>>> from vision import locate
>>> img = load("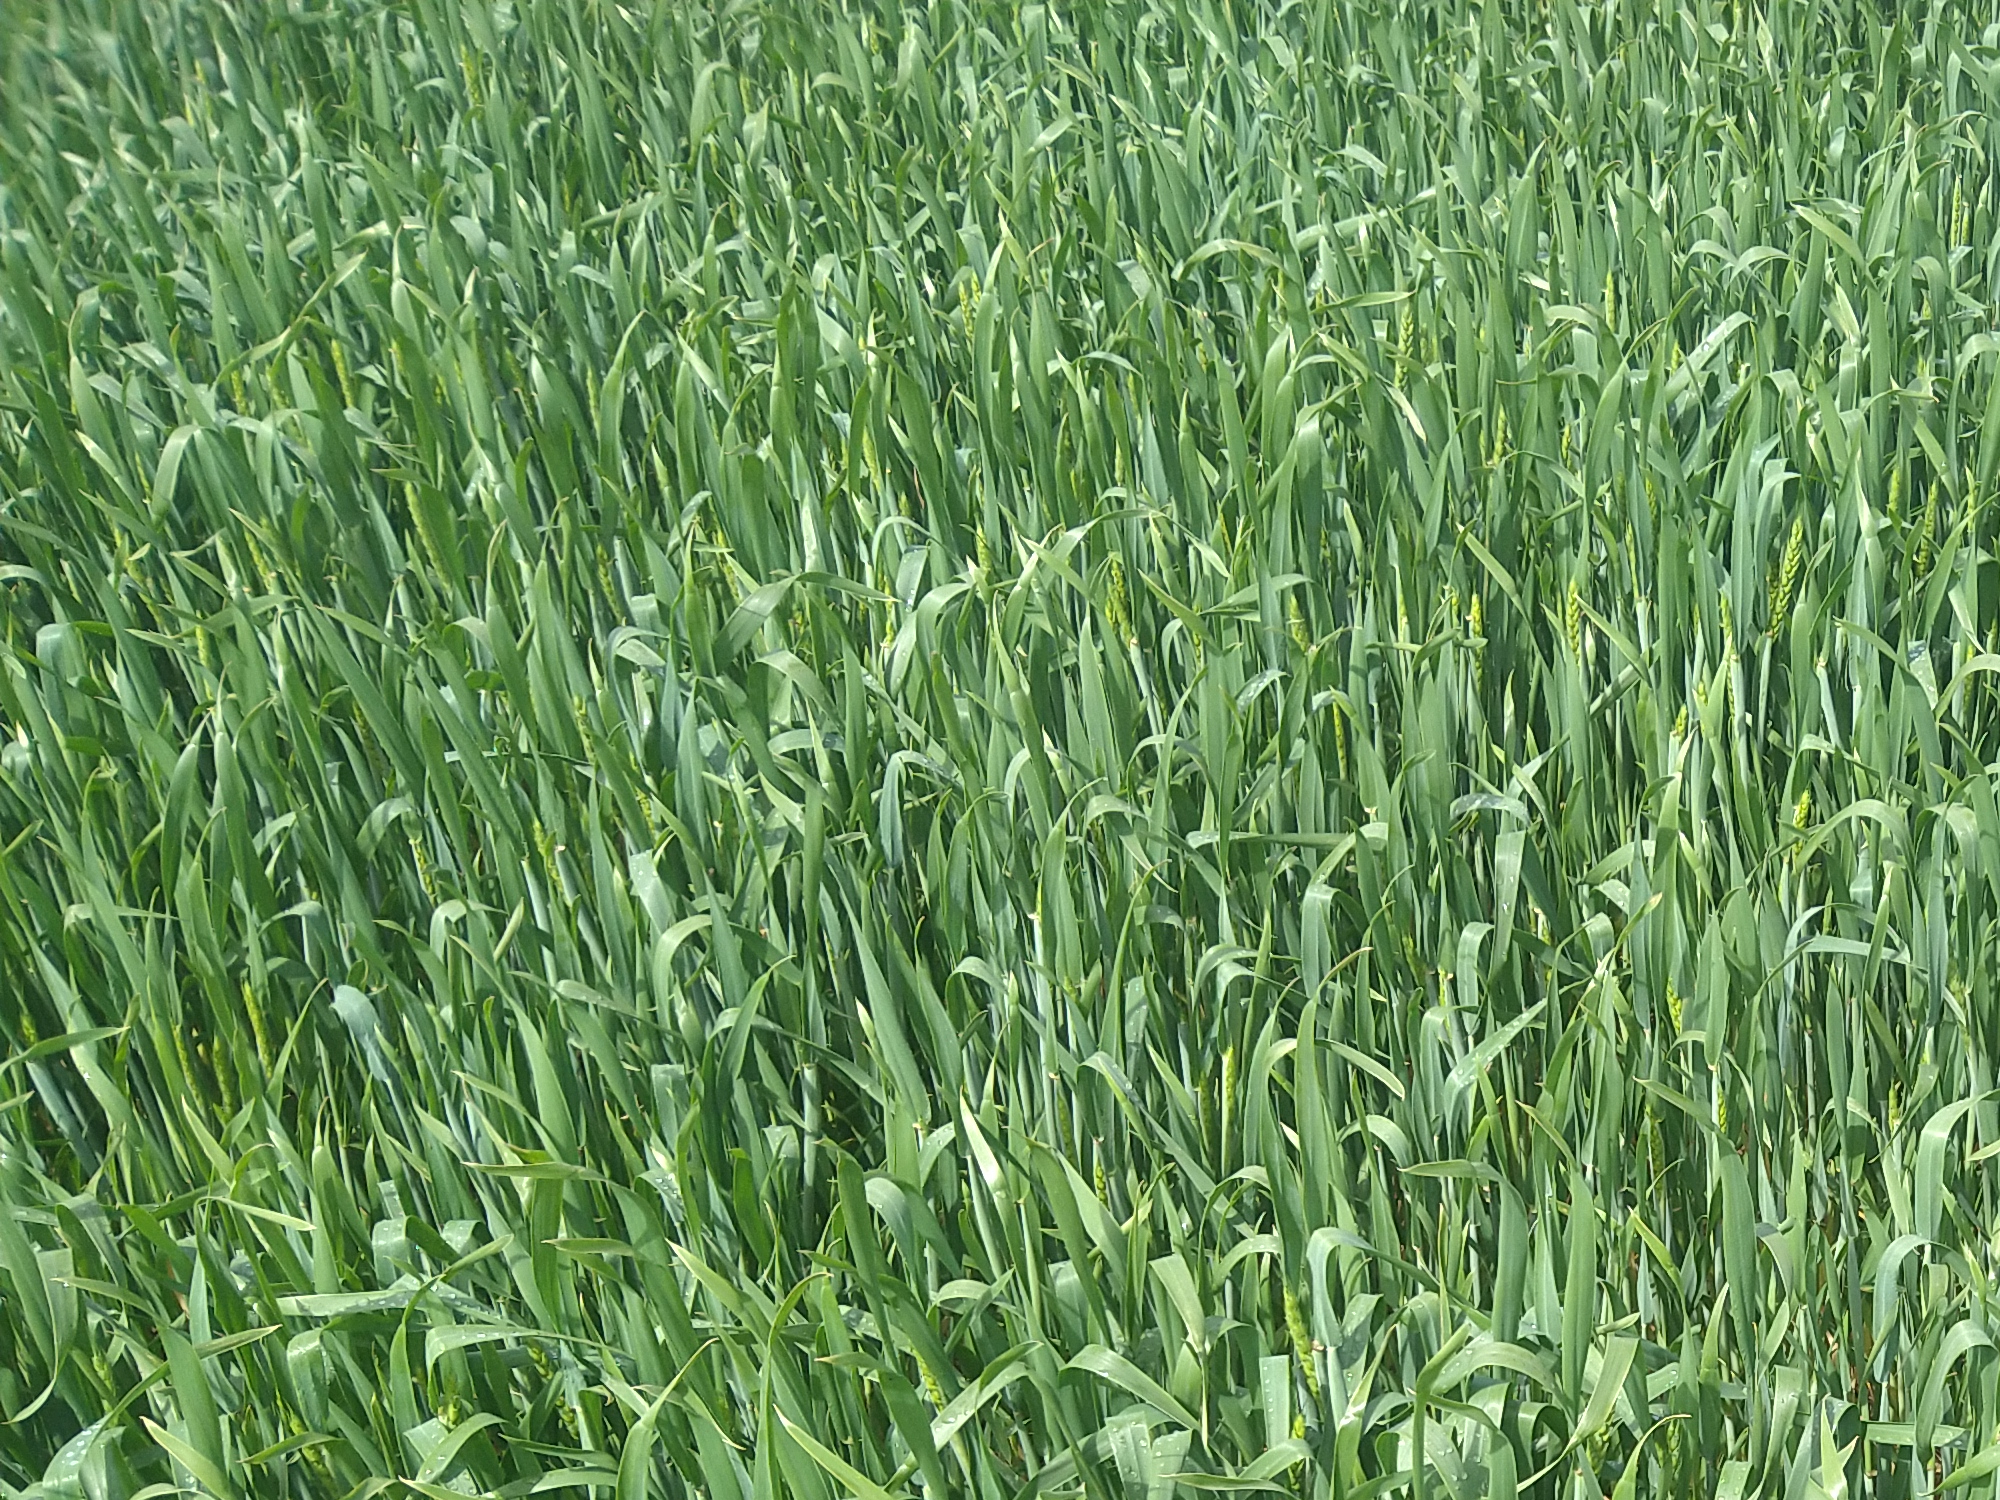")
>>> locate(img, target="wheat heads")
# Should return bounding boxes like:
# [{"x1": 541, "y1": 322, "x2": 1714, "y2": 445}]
[
  {"x1": 170, "y1": 1023, "x2": 200, "y2": 1115},
  {"x1": 1217, "y1": 512, "x2": 1232, "y2": 562},
  {"x1": 1111, "y1": 560, "x2": 1137, "y2": 604},
  {"x1": 899, "y1": 492, "x2": 913, "y2": 545},
  {"x1": 529, "y1": 808, "x2": 559, "y2": 893},
  {"x1": 432, "y1": 356, "x2": 450, "y2": 405},
  {"x1": 158, "y1": 572, "x2": 179, "y2": 605},
  {"x1": 1106, "y1": 576, "x2": 1134, "y2": 634},
  {"x1": 1399, "y1": 933, "x2": 1429, "y2": 996},
  {"x1": 1080, "y1": 500, "x2": 1086, "y2": 534},
  {"x1": 1318, "y1": 285, "x2": 1326, "y2": 326},
  {"x1": 1112, "y1": 436, "x2": 1124, "y2": 484},
  {"x1": 261, "y1": 514, "x2": 277, "y2": 572},
  {"x1": 408, "y1": 830, "x2": 434, "y2": 902},
  {"x1": 1200, "y1": 1080, "x2": 1215, "y2": 1148},
  {"x1": 1061, "y1": 393, "x2": 1074, "y2": 457},
  {"x1": 1966, "y1": 466, "x2": 1975, "y2": 534},
  {"x1": 879, "y1": 550, "x2": 899, "y2": 641},
  {"x1": 715, "y1": 546, "x2": 741, "y2": 599},
  {"x1": 393, "y1": 337, "x2": 408, "y2": 376},
  {"x1": 1718, "y1": 1082, "x2": 1728, "y2": 1135},
  {"x1": 243, "y1": 978, "x2": 271, "y2": 1087},
  {"x1": 576, "y1": 696, "x2": 600, "y2": 760},
  {"x1": 198, "y1": 61, "x2": 210, "y2": 121},
  {"x1": 1127, "y1": 370, "x2": 1141, "y2": 450},
  {"x1": 637, "y1": 775, "x2": 660, "y2": 822},
  {"x1": 1496, "y1": 403, "x2": 1507, "y2": 461},
  {"x1": 1088, "y1": 819, "x2": 1105, "y2": 859},
  {"x1": 332, "y1": 338, "x2": 351, "y2": 405},
  {"x1": 336, "y1": 62, "x2": 349, "y2": 98},
  {"x1": 1224, "y1": 1045, "x2": 1238, "y2": 1121},
  {"x1": 1334, "y1": 698, "x2": 1345, "y2": 781},
  {"x1": 861, "y1": 423, "x2": 879, "y2": 484},
  {"x1": 1289, "y1": 591, "x2": 1315, "y2": 647},
  {"x1": 975, "y1": 515, "x2": 994, "y2": 577},
  {"x1": 1267, "y1": 686, "x2": 1277, "y2": 744},
  {"x1": 116, "y1": 778, "x2": 159, "y2": 888},
  {"x1": 1978, "y1": 178, "x2": 1989, "y2": 209},
  {"x1": 695, "y1": 552, "x2": 708, "y2": 620},
  {"x1": 913, "y1": 1343, "x2": 944, "y2": 1414},
  {"x1": 824, "y1": 442, "x2": 835, "y2": 481},
  {"x1": 1540, "y1": 926, "x2": 1555, "y2": 979},
  {"x1": 1962, "y1": 202, "x2": 1972, "y2": 246},
  {"x1": 92, "y1": 1351, "x2": 120, "y2": 1422},
  {"x1": 1724, "y1": 597, "x2": 1740, "y2": 719},
  {"x1": 1768, "y1": 546, "x2": 1780, "y2": 617},
  {"x1": 1441, "y1": 968, "x2": 1450, "y2": 1029},
  {"x1": 290, "y1": 1412, "x2": 334, "y2": 1498},
  {"x1": 134, "y1": 571, "x2": 176, "y2": 633},
  {"x1": 1469, "y1": 593, "x2": 1483, "y2": 693},
  {"x1": 1948, "y1": 967, "x2": 1965, "y2": 1008},
  {"x1": 1190, "y1": 604, "x2": 1203, "y2": 664},
  {"x1": 1580, "y1": 1420, "x2": 1603, "y2": 1476},
  {"x1": 196, "y1": 611, "x2": 222, "y2": 694},
  {"x1": 19, "y1": 1005, "x2": 38, "y2": 1051},
  {"x1": 1600, "y1": 1420, "x2": 1623, "y2": 1465},
  {"x1": 1604, "y1": 270, "x2": 1613, "y2": 330},
  {"x1": 1951, "y1": 176, "x2": 1961, "y2": 250},
  {"x1": 584, "y1": 364, "x2": 601, "y2": 433},
  {"x1": 599, "y1": 546, "x2": 627, "y2": 621},
  {"x1": 1626, "y1": 521, "x2": 1639, "y2": 592},
  {"x1": 298, "y1": 859, "x2": 320, "y2": 903},
  {"x1": 1653, "y1": 1124, "x2": 1664, "y2": 1194},
  {"x1": 529, "y1": 1345, "x2": 585, "y2": 1441},
  {"x1": 1398, "y1": 580, "x2": 1409, "y2": 628},
  {"x1": 651, "y1": 446, "x2": 670, "y2": 488},
  {"x1": 868, "y1": 14, "x2": 883, "y2": 55},
  {"x1": 962, "y1": 1179, "x2": 974, "y2": 1212},
  {"x1": 1560, "y1": 424, "x2": 1570, "y2": 461},
  {"x1": 1668, "y1": 975, "x2": 1682, "y2": 1035},
  {"x1": 147, "y1": 572, "x2": 159, "y2": 601},
  {"x1": 1671, "y1": 345, "x2": 1684, "y2": 374},
  {"x1": 960, "y1": 263, "x2": 974, "y2": 355},
  {"x1": 1615, "y1": 470, "x2": 1625, "y2": 527},
  {"x1": 1396, "y1": 300, "x2": 1415, "y2": 401},
  {"x1": 349, "y1": 700, "x2": 396, "y2": 803},
  {"x1": 1962, "y1": 641, "x2": 1974, "y2": 700},
  {"x1": 970, "y1": 266, "x2": 982, "y2": 312},
  {"x1": 1419, "y1": 321, "x2": 1433, "y2": 364},
  {"x1": 231, "y1": 361, "x2": 247, "y2": 417},
  {"x1": 136, "y1": 451, "x2": 150, "y2": 497},
  {"x1": 1057, "y1": 1092, "x2": 1072, "y2": 1165},
  {"x1": 1888, "y1": 463, "x2": 1898, "y2": 520},
  {"x1": 455, "y1": 361, "x2": 466, "y2": 410},
  {"x1": 267, "y1": 365, "x2": 300, "y2": 438},
  {"x1": 1645, "y1": 476, "x2": 1656, "y2": 539},
  {"x1": 1322, "y1": 532, "x2": 1329, "y2": 586},
  {"x1": 1918, "y1": 474, "x2": 1940, "y2": 573},
  {"x1": 135, "y1": 998, "x2": 154, "y2": 1042},
  {"x1": 1690, "y1": 588, "x2": 1698, "y2": 637},
  {"x1": 1917, "y1": 353, "x2": 1929, "y2": 382},
  {"x1": 1451, "y1": 587, "x2": 1461, "y2": 673},
  {"x1": 406, "y1": 481, "x2": 447, "y2": 578},
  {"x1": 1674, "y1": 706, "x2": 1688, "y2": 739},
  {"x1": 183, "y1": 971, "x2": 206, "y2": 1046},
  {"x1": 1889, "y1": 1083, "x2": 1901, "y2": 1137},
  {"x1": 756, "y1": 888, "x2": 769, "y2": 945},
  {"x1": 1233, "y1": 516, "x2": 1247, "y2": 575},
  {"x1": 1770, "y1": 514, "x2": 1807, "y2": 639},
  {"x1": 438, "y1": 1397, "x2": 464, "y2": 1430},
  {"x1": 785, "y1": 585, "x2": 812, "y2": 667},
  {"x1": 1284, "y1": 1291, "x2": 1321, "y2": 1391},
  {"x1": 244, "y1": 523, "x2": 271, "y2": 580},
  {"x1": 1003, "y1": 980, "x2": 1020, "y2": 1026},
  {"x1": 1092, "y1": 1149, "x2": 1109, "y2": 1205},
  {"x1": 1699, "y1": 677, "x2": 1712, "y2": 710},
  {"x1": 976, "y1": 471, "x2": 987, "y2": 507},
  {"x1": 1665, "y1": 1414, "x2": 1674, "y2": 1500},
  {"x1": 1566, "y1": 580, "x2": 1578, "y2": 673},
  {"x1": 1288, "y1": 1410, "x2": 1306, "y2": 1472},
  {"x1": 210, "y1": 1035, "x2": 249, "y2": 1121},
  {"x1": 1792, "y1": 788, "x2": 1810, "y2": 867},
  {"x1": 463, "y1": 42, "x2": 478, "y2": 103},
  {"x1": 1105, "y1": 596, "x2": 1117, "y2": 627},
  {"x1": 565, "y1": 767, "x2": 577, "y2": 801}
]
